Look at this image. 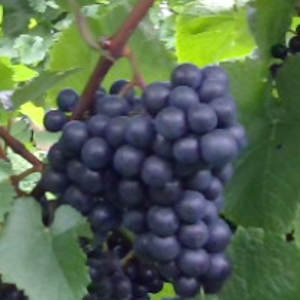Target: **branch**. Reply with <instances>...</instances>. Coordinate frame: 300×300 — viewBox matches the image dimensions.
<instances>
[{
  "label": "branch",
  "mask_w": 300,
  "mask_h": 300,
  "mask_svg": "<svg viewBox=\"0 0 300 300\" xmlns=\"http://www.w3.org/2000/svg\"><path fill=\"white\" fill-rule=\"evenodd\" d=\"M152 4L153 0H138L135 3V7L118 29V32L101 38V56L89 74L88 82L83 89V93L80 95L78 103H76L71 117L72 121L82 118L84 111L90 108L102 80L111 69L114 60L123 54L130 36L145 19Z\"/></svg>",
  "instance_id": "branch-1"
},
{
  "label": "branch",
  "mask_w": 300,
  "mask_h": 300,
  "mask_svg": "<svg viewBox=\"0 0 300 300\" xmlns=\"http://www.w3.org/2000/svg\"><path fill=\"white\" fill-rule=\"evenodd\" d=\"M0 136L6 141L7 145L11 147L18 155L27 160L33 166L20 173L17 176H13L11 181L13 183H19L39 171L44 169L42 162L37 160L29 148L21 141L13 137L2 125H0Z\"/></svg>",
  "instance_id": "branch-2"
}]
</instances>
